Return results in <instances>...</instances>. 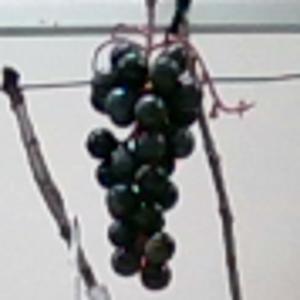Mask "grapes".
<instances>
[{
    "label": "grapes",
    "mask_w": 300,
    "mask_h": 300,
    "mask_svg": "<svg viewBox=\"0 0 300 300\" xmlns=\"http://www.w3.org/2000/svg\"><path fill=\"white\" fill-rule=\"evenodd\" d=\"M109 60L111 68L92 74V106L117 127L135 121L144 127L140 148L133 153L106 128L93 130L86 139L87 154L100 161L94 176L106 189L105 206L114 220L107 237L118 248L109 265L120 278L141 275L144 288L158 292L172 283V270L164 263L176 249L173 236L162 232L163 213L179 203L178 186L165 178L174 172L175 159L195 150V137L184 129L197 123L205 94L194 78L184 75L194 53L183 42H170L150 63L139 43L125 40L112 47Z\"/></svg>",
    "instance_id": "1"
}]
</instances>
